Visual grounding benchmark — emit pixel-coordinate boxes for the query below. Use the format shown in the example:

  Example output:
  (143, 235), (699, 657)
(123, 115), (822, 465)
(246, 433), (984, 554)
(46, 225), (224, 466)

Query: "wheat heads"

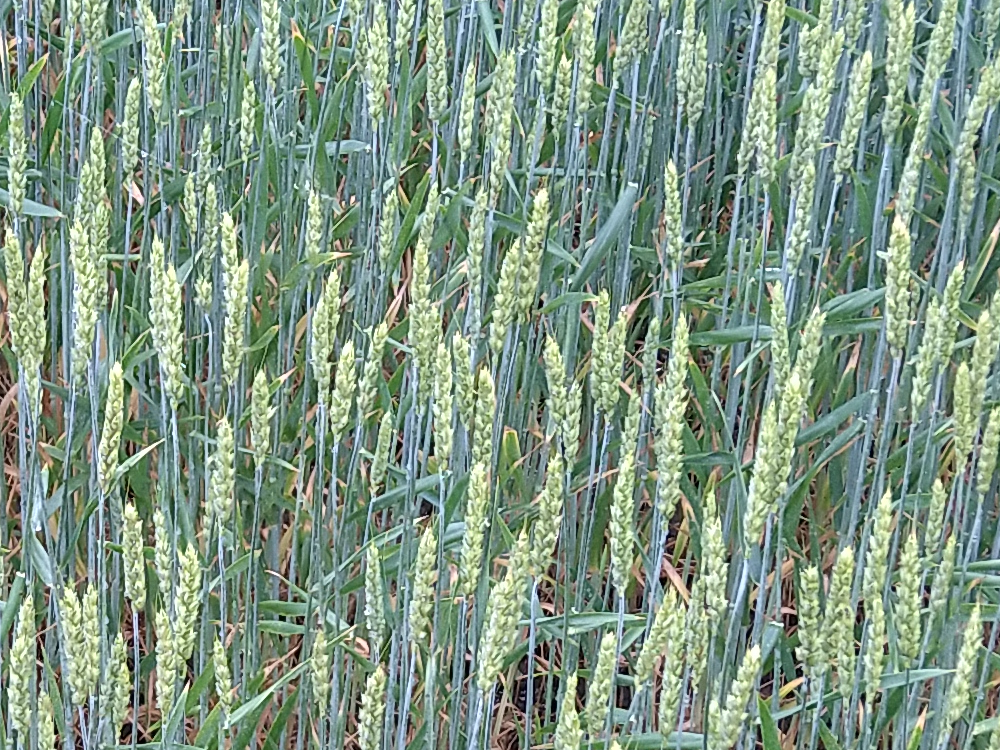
(263, 0), (282, 79)
(169, 0), (196, 34)
(360, 323), (390, 415)
(635, 588), (678, 681)
(886, 0), (903, 81)
(886, 220), (912, 351)
(970, 311), (995, 423)
(934, 0), (961, 69)
(143, 12), (165, 112)
(786, 163), (816, 274)
(312, 630), (329, 713)
(757, 0), (787, 79)
(8, 599), (35, 733)
(720, 647), (763, 750)
(912, 302), (941, 417)
(123, 77), (141, 177)
(252, 369), (271, 462)
(478, 532), (530, 687)
(58, 587), (87, 702)
(938, 264), (965, 365)
(313, 270), (341, 380)
(413, 181), (440, 303)
(895, 94), (934, 221)
(790, 125), (830, 184)
(197, 123), (212, 206)
(834, 53), (873, 172)
(368, 0), (389, 118)
(410, 244), (431, 358)
(976, 294), (1000, 416)
(564, 381), (583, 466)
(989, 9), (1000, 102)
(87, 0), (108, 40)
(489, 98), (514, 206)
(485, 52), (507, 141)
(978, 408), (1000, 494)
(92, 203), (111, 309)
(432, 343), (453, 468)
(609, 394), (640, 582)
(331, 343), (357, 434)
(657, 315), (690, 511)
(865, 493), (895, 601)
(395, 0), (421, 53)
(884, 5), (916, 134)
(222, 262), (250, 383)
(931, 535), (957, 624)
(770, 281), (790, 394)
(9, 94), (26, 211)
(89, 125), (105, 202)
(213, 639), (235, 714)
(896, 532), (922, 666)
(659, 615), (687, 740)
(847, 0), (873, 43)
(558, 673), (581, 750)
(704, 518), (729, 627)
(155, 612), (176, 720)
(4, 230), (26, 354)
(924, 479), (947, 563)
(953, 363), (973, 468)
(372, 411), (394, 490)
(98, 363), (125, 490)
(738, 17), (772, 168)
(920, 30), (942, 104)
(201, 180), (219, 273)
(813, 0), (834, 67)
(614, 0), (643, 71)
(70, 223), (96, 389)
(555, 57), (570, 132)
(460, 61), (475, 151)
(123, 505), (145, 606)
(812, 34), (843, 129)
(409, 531), (437, 642)
(239, 82), (258, 146)
(577, 2), (596, 115)
(798, 27), (810, 76)
(462, 464), (490, 592)
(538, 0), (559, 90)
(603, 315), (627, 412)
(665, 160), (682, 266)
(454, 335), (474, 423)
(745, 403), (777, 543)
(498, 50), (519, 116)
(985, 0), (1000, 42)
(517, 0), (539, 46)
(39, 689), (56, 750)
(466, 190), (486, 336)
(945, 607), (984, 725)
(687, 577), (708, 682)
(345, 0), (368, 70)
(531, 457), (565, 576)
(789, 91), (815, 180)
(866, 597), (885, 698)
(642, 317), (660, 400)
(113, 635), (131, 729)
(591, 290), (611, 402)
(690, 32), (709, 121)
(518, 191), (551, 319)
(212, 418), (236, 536)
(543, 336), (567, 430)
(774, 312), (825, 492)
(27, 245), (47, 363)
(164, 266), (184, 401)
(759, 72), (778, 178)
(472, 367), (496, 471)
(306, 189), (323, 267)
(490, 240), (521, 351)
(586, 633), (618, 739)
(677, 0), (696, 104)
(822, 550), (856, 669)
(959, 152), (977, 233)
(365, 545), (386, 658)
(954, 67), (995, 161)
(72, 164), (92, 233)
(85, 586), (102, 700)
(378, 192), (397, 266)
(415, 303), (443, 410)
(176, 547), (202, 665)
(426, 0), (447, 116)
(640, 0), (650, 43)
(360, 667), (386, 750)
(798, 566), (821, 669)
(757, 125), (779, 184)
(154, 509), (173, 610)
